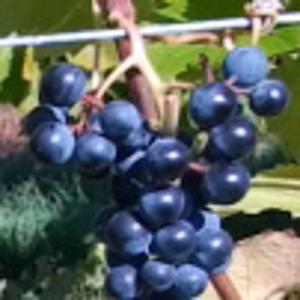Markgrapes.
Returning a JSON list of instances; mask_svg holds the SVG:
<instances>
[{"mask_svg": "<svg viewBox=\"0 0 300 300\" xmlns=\"http://www.w3.org/2000/svg\"><path fill=\"white\" fill-rule=\"evenodd\" d=\"M40 103L21 123L32 154L88 181L114 177L116 206L98 212L94 231L106 245L107 289L118 300H199L211 277L227 272L235 238L211 207L239 204L251 186L256 126L241 116L236 93L219 80L197 86L185 102L191 124L210 132L212 167L188 171L187 134L165 137L128 99L89 87L70 62L55 63L40 84Z\"/></svg>", "mask_w": 300, "mask_h": 300, "instance_id": "1", "label": "grapes"}, {"mask_svg": "<svg viewBox=\"0 0 300 300\" xmlns=\"http://www.w3.org/2000/svg\"><path fill=\"white\" fill-rule=\"evenodd\" d=\"M221 73L237 90H247L249 108L258 117H276L290 100V91L283 81L270 77L265 52L256 46H236L221 61Z\"/></svg>", "mask_w": 300, "mask_h": 300, "instance_id": "2", "label": "grapes"}]
</instances>
